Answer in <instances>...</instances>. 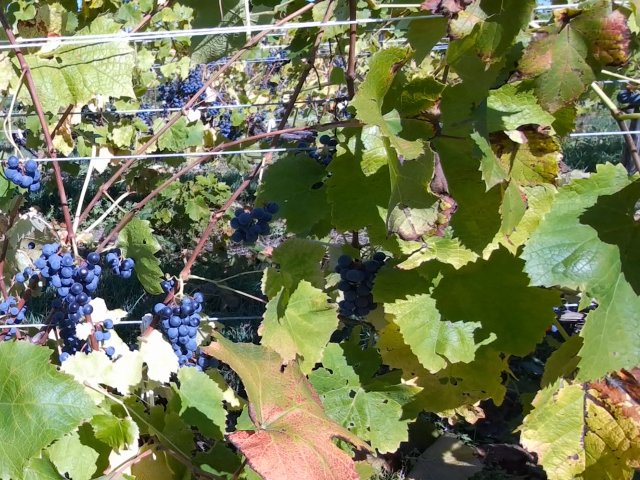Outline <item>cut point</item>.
<instances>
[{
    "mask_svg": "<svg viewBox=\"0 0 640 480\" xmlns=\"http://www.w3.org/2000/svg\"><path fill=\"white\" fill-rule=\"evenodd\" d=\"M23 82H24V78H23V74H22V71H21V73L19 75V79H18V81H17V83L15 85L12 98H11V100L9 102V105H8L9 109H12L14 107V105L16 103V100H17V97H18V94H19V90H20Z\"/></svg>",
    "mask_w": 640,
    "mask_h": 480,
    "instance_id": "6a23745f",
    "label": "cut point"
},
{
    "mask_svg": "<svg viewBox=\"0 0 640 480\" xmlns=\"http://www.w3.org/2000/svg\"><path fill=\"white\" fill-rule=\"evenodd\" d=\"M71 247H72V251H73L74 255L78 256L79 255V250L77 249V244H76V239L75 238H73V242L71 244Z\"/></svg>",
    "mask_w": 640,
    "mask_h": 480,
    "instance_id": "7d7e1d6f",
    "label": "cut point"
}]
</instances>
